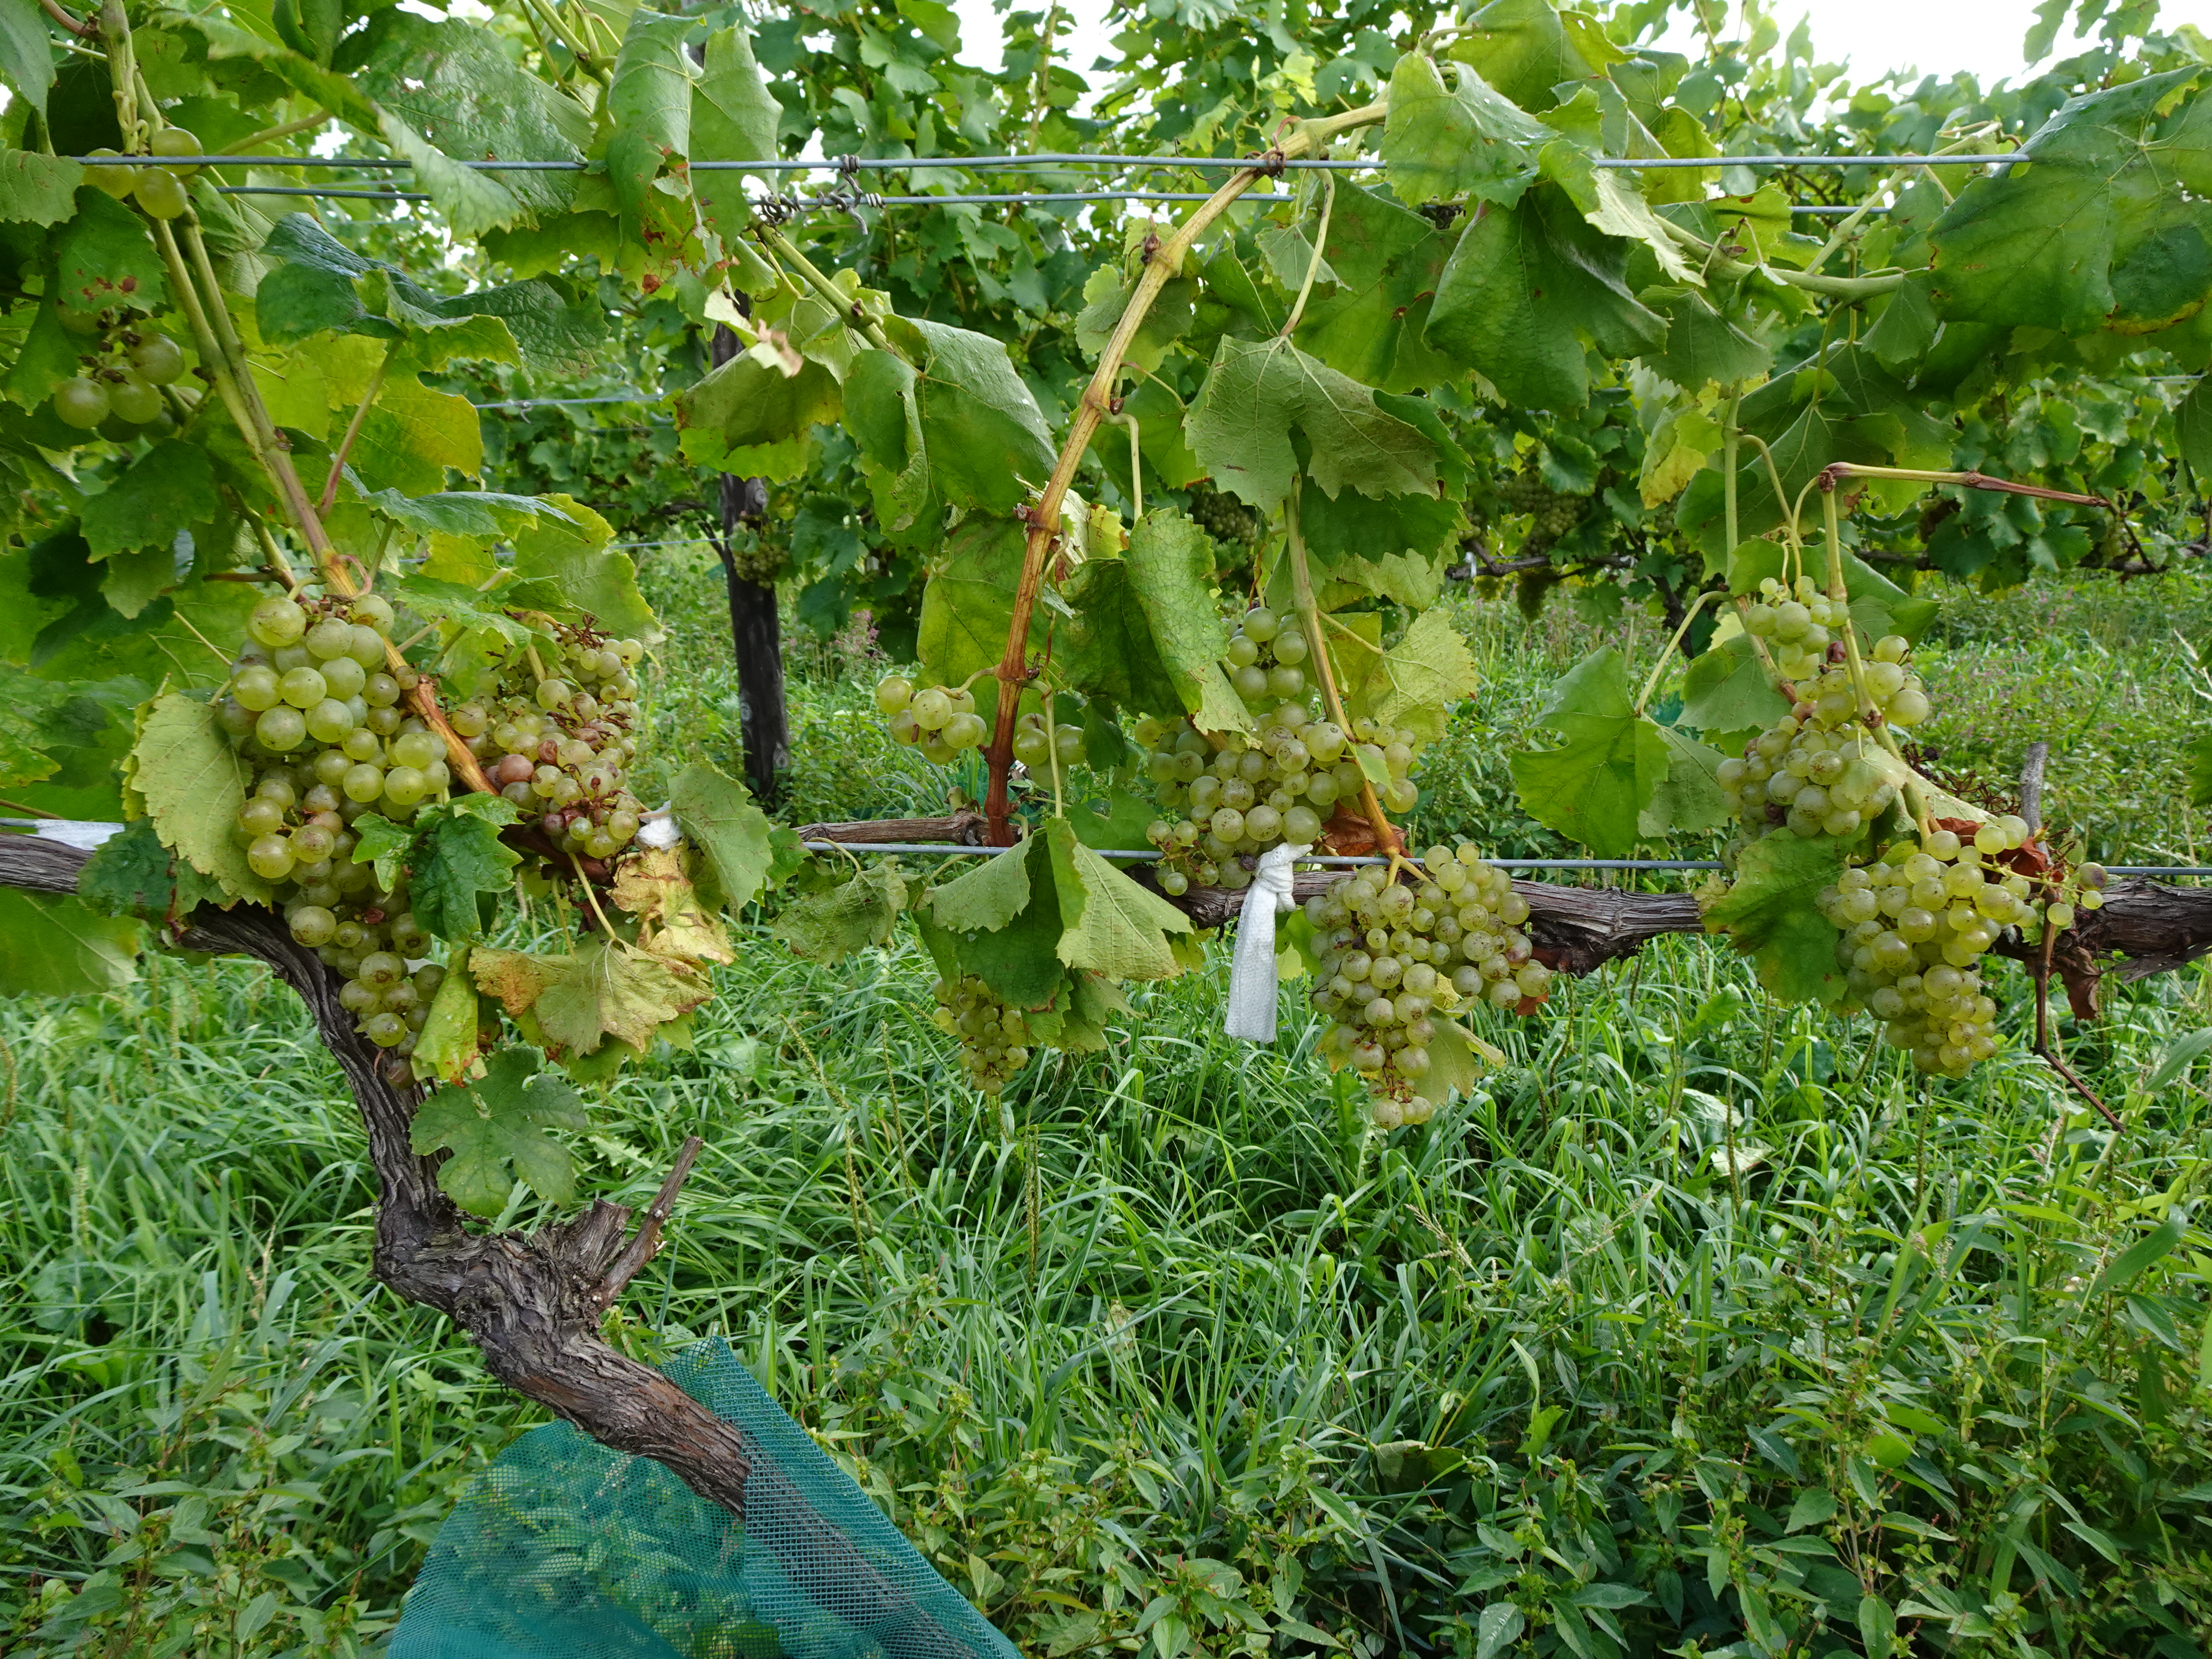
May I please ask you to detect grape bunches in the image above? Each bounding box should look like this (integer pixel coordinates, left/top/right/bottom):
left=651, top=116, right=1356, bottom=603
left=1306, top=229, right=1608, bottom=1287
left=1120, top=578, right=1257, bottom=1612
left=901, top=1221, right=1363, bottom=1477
left=452, top=626, right=644, bottom=859
left=52, top=127, right=204, bottom=429
left=1815, top=831, right=2015, bottom=1077
left=875, top=674, right=987, bottom=765
left=1743, top=576, right=1849, bottom=680
left=1303, top=862, right=1449, bottom=1130
left=1715, top=634, right=1928, bottom=870
left=1012, top=712, right=1089, bottom=792
left=230, top=763, right=500, bottom=1085
left=1146, top=714, right=1419, bottom=895
left=1132, top=715, right=1211, bottom=812
left=1958, top=815, right=2107, bottom=926
left=1226, top=606, right=1315, bottom=734
left=1406, top=841, right=1553, bottom=1011
left=931, top=977, right=1029, bottom=1096
left=218, top=594, right=452, bottom=819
